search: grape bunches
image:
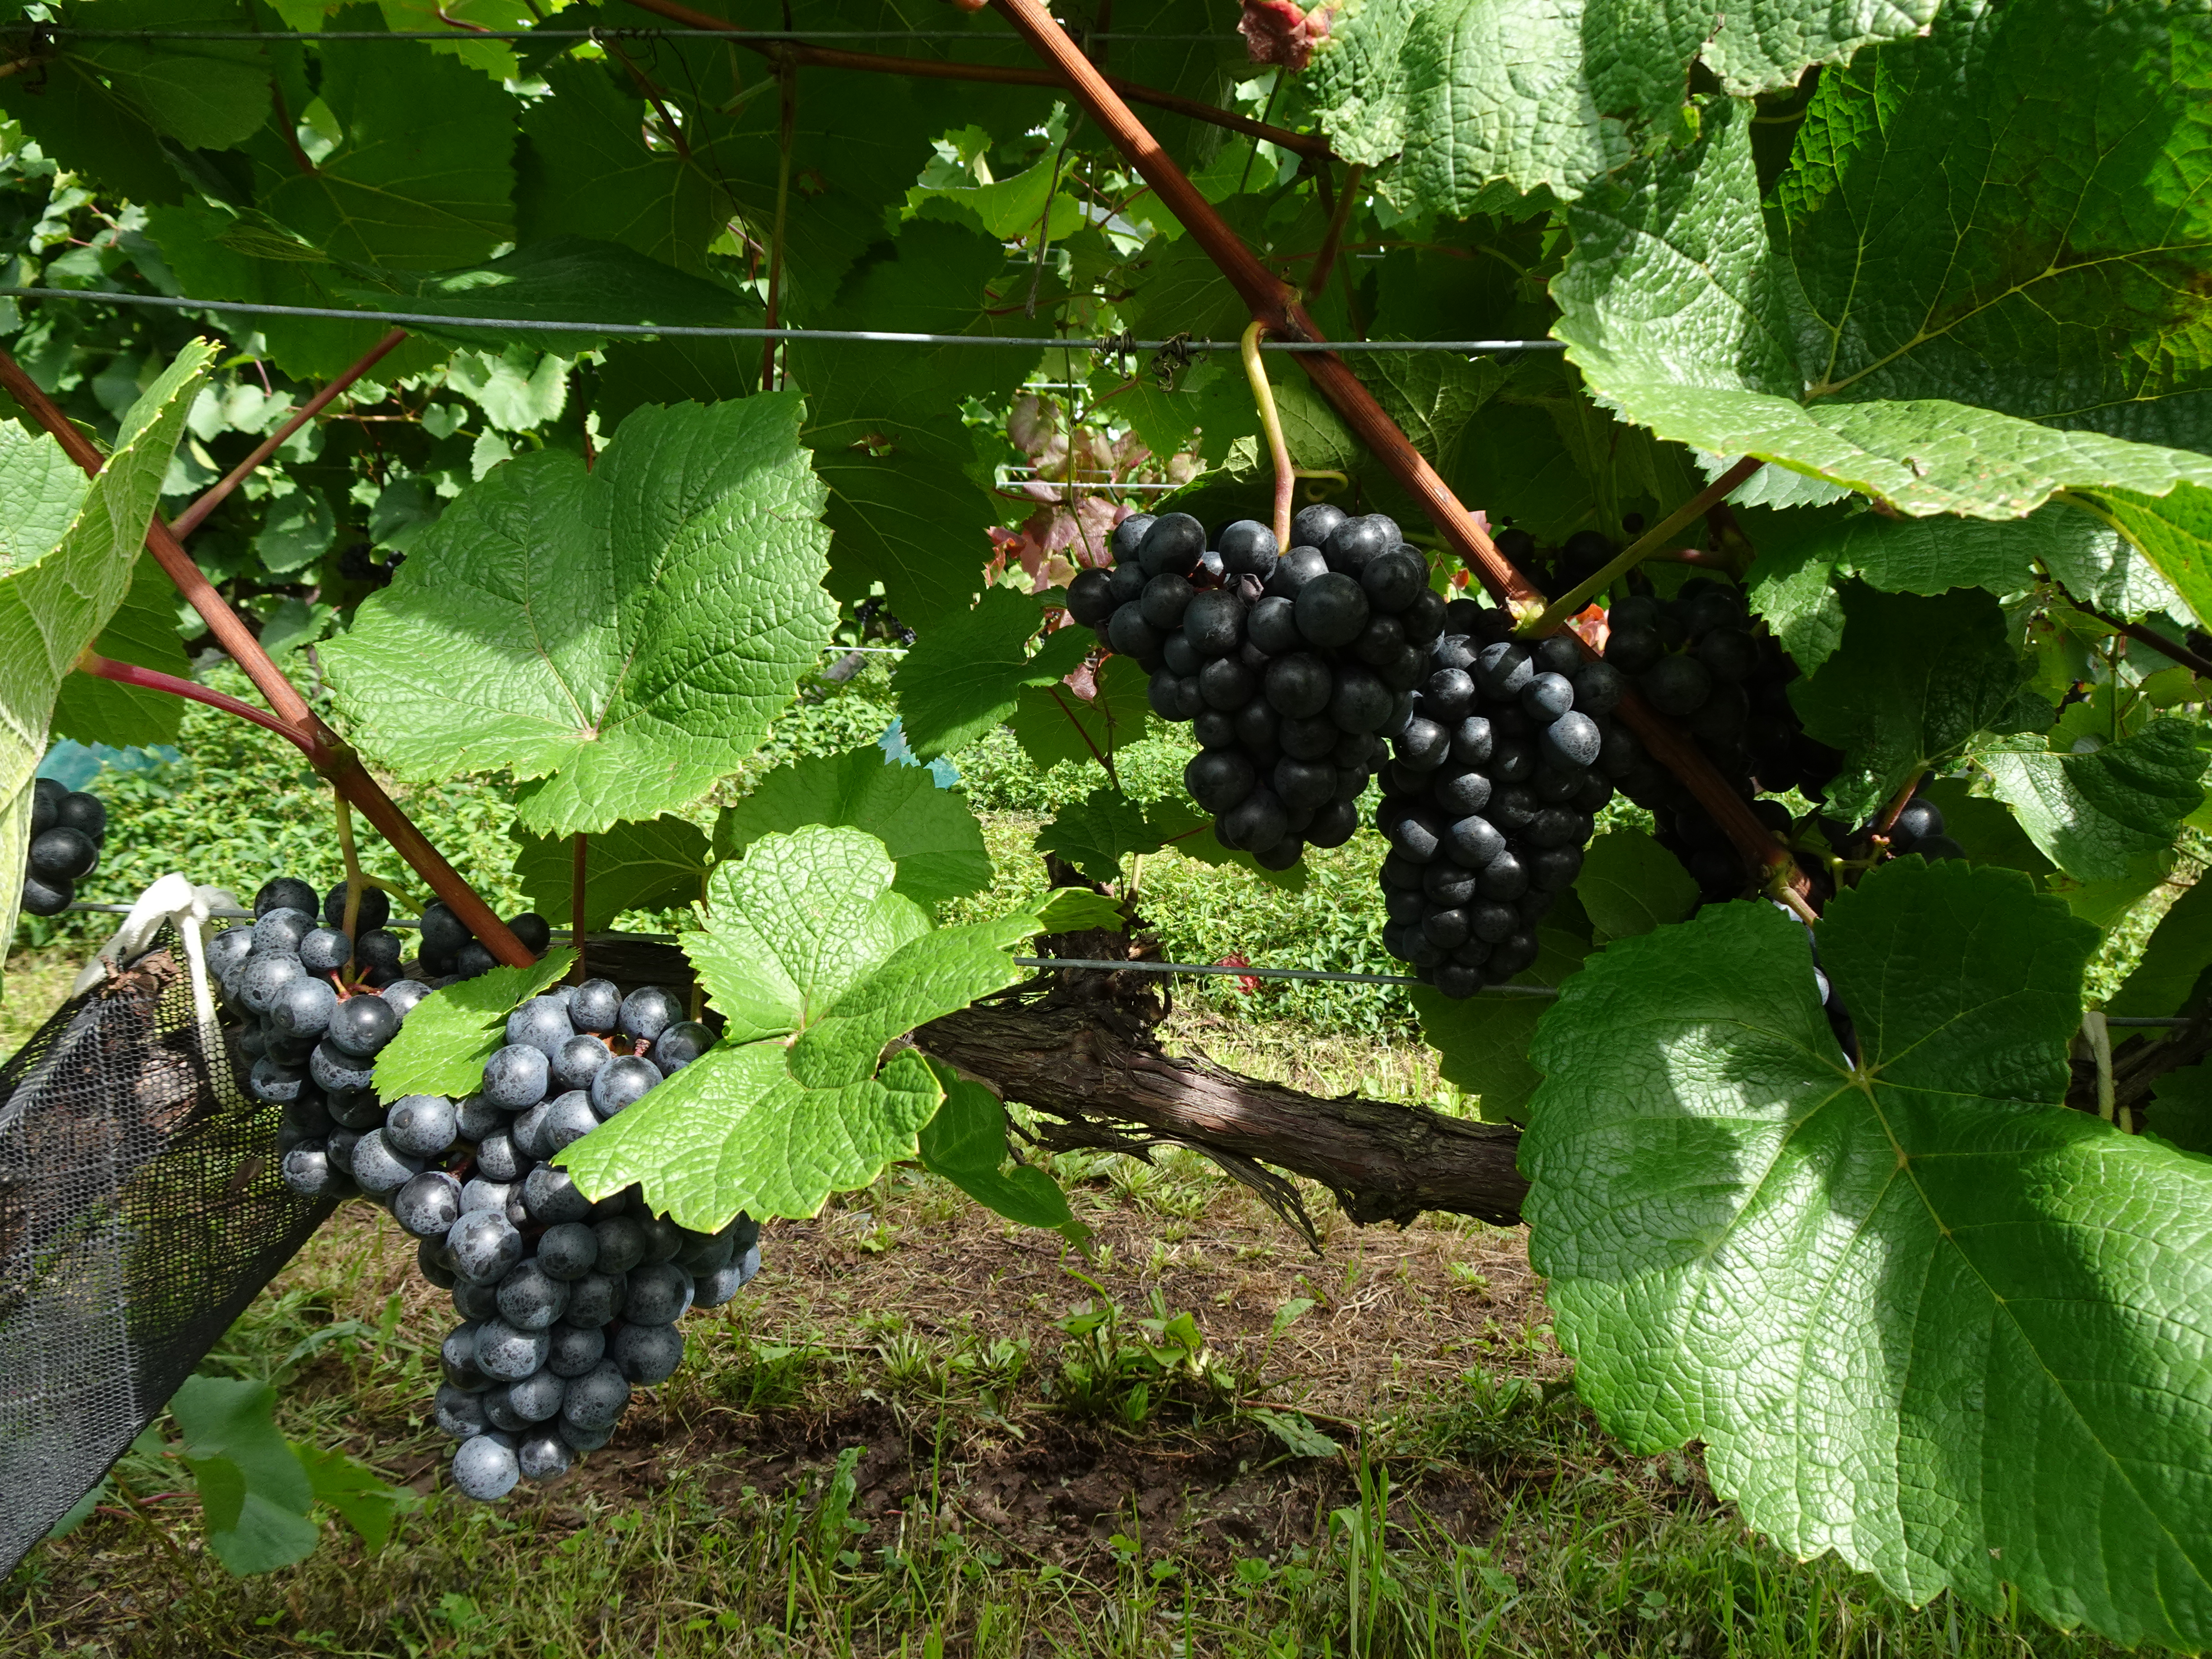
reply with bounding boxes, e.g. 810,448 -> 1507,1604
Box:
1755,632 -> 1847,801
1374,599 -> 1635,998
1603,580 -> 1792,900
1068,504 -> 1443,871
204,877 -> 404,1192
417,900 -> 552,975
1817,768 -> 1970,889
1491,512 -> 1653,617
351,978 -> 764,1500
18,776 -> 106,917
